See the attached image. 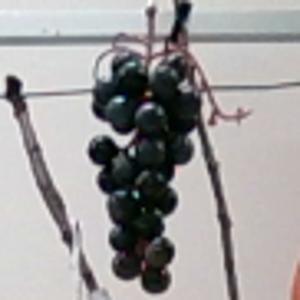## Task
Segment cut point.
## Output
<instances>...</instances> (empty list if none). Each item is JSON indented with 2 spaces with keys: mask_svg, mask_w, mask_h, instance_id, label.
<instances>
[{
  "mask_svg": "<svg viewBox=\"0 0 300 300\" xmlns=\"http://www.w3.org/2000/svg\"><path fill=\"white\" fill-rule=\"evenodd\" d=\"M160 0H147L144 15L147 18L146 64L153 68V39L155 35L156 14Z\"/></svg>",
  "mask_w": 300,
  "mask_h": 300,
  "instance_id": "cut-point-1",
  "label": "cut point"
}]
</instances>
